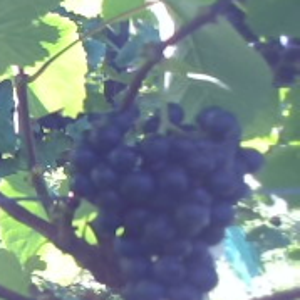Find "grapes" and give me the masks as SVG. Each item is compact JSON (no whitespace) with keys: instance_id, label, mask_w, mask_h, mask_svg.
<instances>
[{"instance_id":"obj_1","label":"grapes","mask_w":300,"mask_h":300,"mask_svg":"<svg viewBox=\"0 0 300 300\" xmlns=\"http://www.w3.org/2000/svg\"><path fill=\"white\" fill-rule=\"evenodd\" d=\"M184 122L173 103L130 126L110 110L68 157L72 191L101 206L93 230L130 300H199L216 287L224 227L264 165L257 148H239L234 112L208 105L197 126Z\"/></svg>"}]
</instances>
